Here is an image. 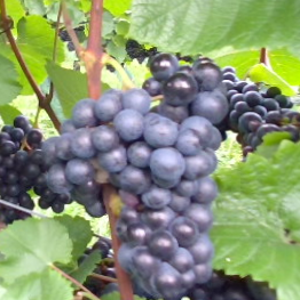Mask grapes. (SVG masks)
<instances>
[{"mask_svg": "<svg viewBox=\"0 0 300 300\" xmlns=\"http://www.w3.org/2000/svg\"><path fill=\"white\" fill-rule=\"evenodd\" d=\"M142 88L109 89L71 110L62 134L41 144L54 194L75 192L96 218L106 214L101 187L113 186L124 207L114 234L121 269L151 297L179 298L213 275L215 243L210 176L229 115L222 68L210 57L179 65L169 52L150 63ZM164 94L151 109L152 98Z\"/></svg>", "mask_w": 300, "mask_h": 300, "instance_id": "1", "label": "grapes"}]
</instances>
